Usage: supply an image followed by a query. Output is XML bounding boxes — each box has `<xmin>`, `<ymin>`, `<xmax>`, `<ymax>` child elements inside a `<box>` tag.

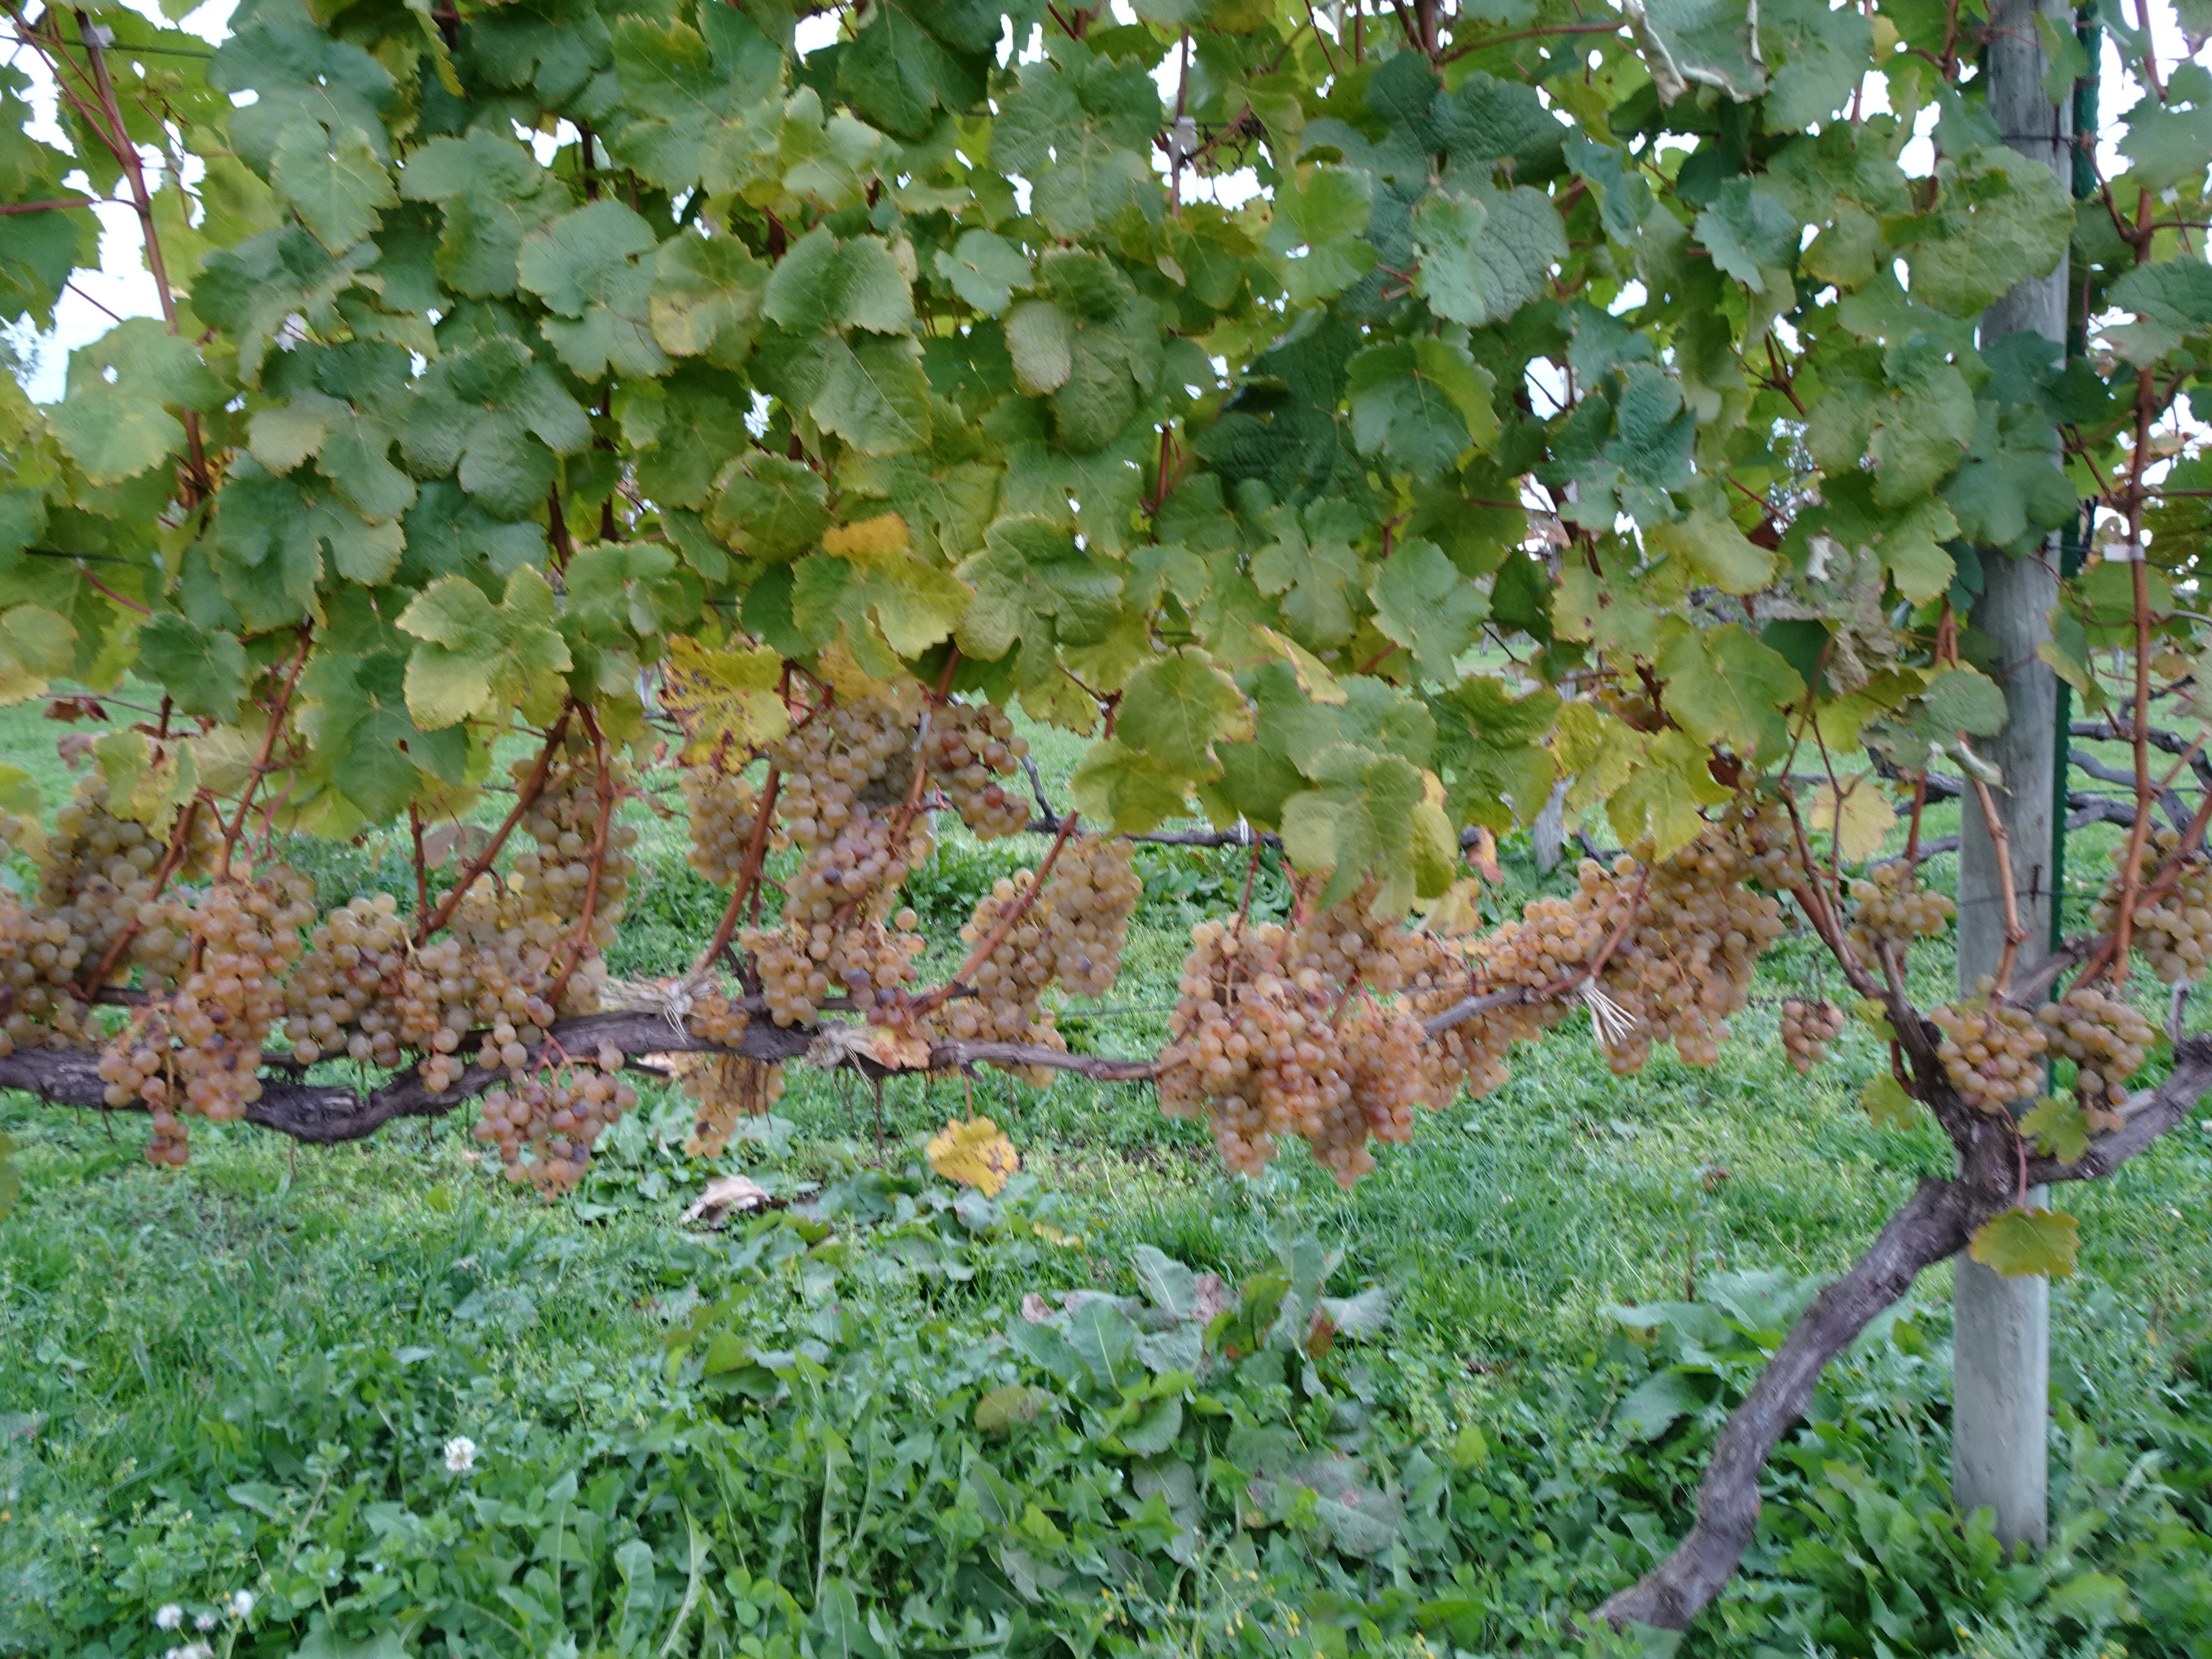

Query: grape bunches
<box><xmin>2037</xmin><ymin>988</ymin><xmax>2156</xmax><ymax>1131</ymax></box>
<box><xmin>1042</xmin><ymin>831</ymin><xmax>1142</xmax><ymax>997</ymax></box>
<box><xmin>474</xmin><ymin>1079</ymin><xmax>550</xmax><ymax>1186</ymax></box>
<box><xmin>904</xmin><ymin>773</ymin><xmax>937</xmax><ymax>857</ymax></box>
<box><xmin>181</xmin><ymin>794</ymin><xmax>230</xmax><ymax>881</ymax></box>
<box><xmin>920</xmin><ymin>984</ymin><xmax>1068</xmax><ymax>1088</ymax></box>
<box><xmin>2089</xmin><ymin>820</ymin><xmax>2212</xmax><ymax>985</ymax></box>
<box><xmin>1295</xmin><ymin>875</ymin><xmax>1357</xmax><ymax>999</ymax></box>
<box><xmin>667</xmin><ymin>1050</ymin><xmax>787</xmax><ymax>1161</ymax></box>
<box><xmin>678</xmin><ymin>764</ymin><xmax>789</xmax><ymax>887</ymax></box>
<box><xmin>740</xmin><ymin>924</ymin><xmax>835</xmax><ymax>1028</ymax></box>
<box><xmin>1930</xmin><ymin>972</ymin><xmax>2049</xmax><ymax>1115</ymax></box>
<box><xmin>1393</xmin><ymin>976</ymin><xmax>1467</xmax><ymax>1111</ymax></box>
<box><xmin>690</xmin><ymin>990</ymin><xmax>746</xmax><ymax>1049</ymax></box>
<box><xmin>1779</xmin><ymin>994</ymin><xmax>1846</xmax><ymax>1075</ymax></box>
<box><xmin>1187</xmin><ymin>1000</ymin><xmax>1276</xmax><ymax>1178</ymax></box>
<box><xmin>455</xmin><ymin>953</ymin><xmax>560</xmax><ymax>1070</ymax></box>
<box><xmin>865</xmin><ymin>726</ymin><xmax>920</xmax><ymax>813</ymax></box>
<box><xmin>514</xmin><ymin>735</ymin><xmax>637</xmax><ymax>948</ymax></box>
<box><xmin>497</xmin><ymin>915</ymin><xmax>607</xmax><ymax>1020</ymax></box>
<box><xmin>922</xmin><ymin>702</ymin><xmax>1030</xmax><ymax>842</ymax></box>
<box><xmin>545</xmin><ymin>1047</ymin><xmax>631</xmax><ymax>1189</ymax></box>
<box><xmin>958</xmin><ymin>867</ymin><xmax>1057</xmax><ymax>1026</ymax></box>
<box><xmin>98</xmin><ymin>1003</ymin><xmax>200</xmax><ymax>1167</ymax></box>
<box><xmin>283</xmin><ymin>928</ymin><xmax>372</xmax><ymax>1063</ymax></box>
<box><xmin>1488</xmin><ymin>896</ymin><xmax>1593</xmax><ymax>1042</ymax></box>
<box><xmin>1847</xmin><ymin>857</ymin><xmax>1956</xmax><ymax>970</ymax></box>
<box><xmin>1167</xmin><ymin>912</ymin><xmax>1297</xmax><ymax>1043</ymax></box>
<box><xmin>394</xmin><ymin>938</ymin><xmax>472</xmax><ymax>1092</ymax></box>
<box><xmin>327</xmin><ymin>893</ymin><xmax>405</xmax><ymax>1068</ymax></box>
<box><xmin>1333</xmin><ymin>995</ymin><xmax>1428</xmax><ymax>1149</ymax></box>
<box><xmin>1634</xmin><ymin>822</ymin><xmax>1757</xmax><ymax>896</ymax></box>
<box><xmin>433</xmin><ymin>873</ymin><xmax>562</xmax><ymax>946</ymax></box>
<box><xmin>170</xmin><ymin>975</ymin><xmax>288</xmax><ymax>1123</ymax></box>
<box><xmin>37</xmin><ymin>731</ymin><xmax>163</xmax><ymax>909</ymax></box>
<box><xmin>1723</xmin><ymin>768</ymin><xmax>1810</xmax><ymax>892</ymax></box>
<box><xmin>65</xmin><ymin>862</ymin><xmax>152</xmax><ymax>973</ymax></box>
<box><xmin>1236</xmin><ymin>973</ymin><xmax>1376</xmax><ymax>1187</ymax></box>
<box><xmin>1331</xmin><ymin>879</ymin><xmax>1424</xmax><ymax>997</ymax></box>
<box><xmin>783</xmin><ymin>800</ymin><xmax>927</xmax><ymax>922</ymax></box>
<box><xmin>137</xmin><ymin>893</ymin><xmax>212</xmax><ymax>994</ymax></box>
<box><xmin>0</xmin><ymin>886</ymin><xmax>106</xmax><ymax>1059</ymax></box>
<box><xmin>764</xmin><ymin>694</ymin><xmax>908</xmax><ymax>843</ymax></box>
<box><xmin>827</xmin><ymin>907</ymin><xmax>926</xmax><ymax>1030</ymax></box>
<box><xmin>1450</xmin><ymin>963</ymin><xmax>1510</xmax><ymax>1101</ymax></box>
<box><xmin>1576</xmin><ymin>855</ymin><xmax>1791</xmax><ymax>1063</ymax></box>
<box><xmin>201</xmin><ymin>861</ymin><xmax>319</xmax><ymax>1020</ymax></box>
<box><xmin>1587</xmin><ymin>970</ymin><xmax>1660</xmax><ymax>1075</ymax></box>
<box><xmin>1425</xmin><ymin>926</ymin><xmax>1495</xmax><ymax>965</ymax></box>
